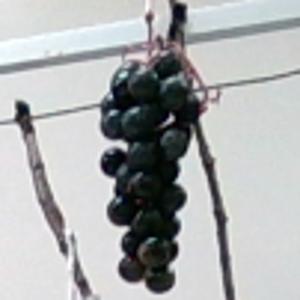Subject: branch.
Here are the masks:
<instances>
[{
  "mask_svg": "<svg viewBox=\"0 0 300 300\" xmlns=\"http://www.w3.org/2000/svg\"><path fill=\"white\" fill-rule=\"evenodd\" d=\"M191 128L193 135H195V142L198 145L197 153L201 160V169L205 175V184L207 192L210 194L213 208L211 213L216 227V243L219 251L223 300H237L232 275L233 257L228 240L230 219L222 195L221 182L217 175L216 162L218 158L211 153V147L202 123V116L197 122L191 124Z\"/></svg>",
  "mask_w": 300,
  "mask_h": 300,
  "instance_id": "2",
  "label": "branch"
},
{
  "mask_svg": "<svg viewBox=\"0 0 300 300\" xmlns=\"http://www.w3.org/2000/svg\"><path fill=\"white\" fill-rule=\"evenodd\" d=\"M13 120L23 134L26 145V161L29 169L31 168L32 186L35 194H37V201L42 209L48 229L55 240L56 247L59 253L66 258L68 267H70L79 296L81 300H101L100 296L91 290L90 283L78 258L77 239L74 231L71 233L65 225V217L55 202L48 179L45 176V163L38 146L31 107L25 99H14Z\"/></svg>",
  "mask_w": 300,
  "mask_h": 300,
  "instance_id": "1",
  "label": "branch"
},
{
  "mask_svg": "<svg viewBox=\"0 0 300 300\" xmlns=\"http://www.w3.org/2000/svg\"><path fill=\"white\" fill-rule=\"evenodd\" d=\"M168 2L170 17L166 32V46L176 48L183 60L182 71L189 84V91L194 94V81L186 60V29L188 22V4L180 0H166Z\"/></svg>",
  "mask_w": 300,
  "mask_h": 300,
  "instance_id": "3",
  "label": "branch"
}]
</instances>
